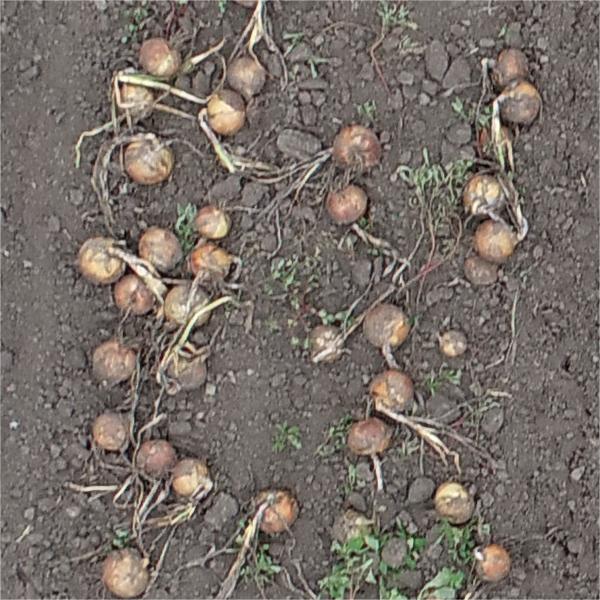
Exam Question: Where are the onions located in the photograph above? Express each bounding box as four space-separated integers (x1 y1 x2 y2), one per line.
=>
123 136 171 183
140 39 179 79
196 208 228 238
187 244 229 279
368 369 412 411
472 541 509 580
462 254 498 285
87 412 129 452
77 237 122 283
432 480 471 522
333 506 369 545
493 48 528 88
482 123 514 160
497 83 538 124
362 303 409 348
347 417 389 454
254 489 296 531
168 459 207 498
140 227 182 272
461 172 507 215
227 52 264 91
332 125 379 171
162 281 207 322
309 326 343 362
114 74 153 116
158 346 206 392
100 548 149 595
113 273 155 312
473 218 514 259
206 90 246 132
436 328 466 359
324 184 365 222
135 439 175 478
92 341 136 383
125 255 159 278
